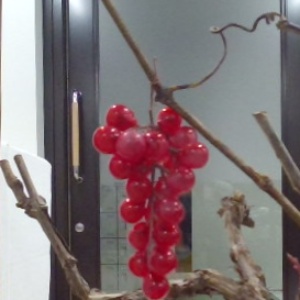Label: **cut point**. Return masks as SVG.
<instances>
[{"label":"cut point","instance_id":"1","mask_svg":"<svg viewBox=\"0 0 300 300\" xmlns=\"http://www.w3.org/2000/svg\"><path fill=\"white\" fill-rule=\"evenodd\" d=\"M150 86V109H149V119H150V124L154 125L153 123V95L155 92V89L153 87V83L149 82Z\"/></svg>","mask_w":300,"mask_h":300}]
</instances>
